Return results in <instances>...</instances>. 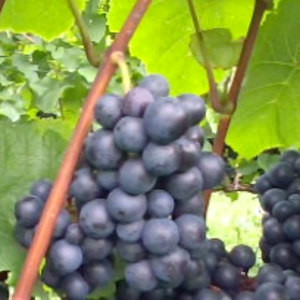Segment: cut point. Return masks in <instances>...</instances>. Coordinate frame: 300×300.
<instances>
[{
  "instance_id": "cut-point-1",
  "label": "cut point",
  "mask_w": 300,
  "mask_h": 300,
  "mask_svg": "<svg viewBox=\"0 0 300 300\" xmlns=\"http://www.w3.org/2000/svg\"><path fill=\"white\" fill-rule=\"evenodd\" d=\"M110 57L112 62L116 64L119 69L122 79L123 93L127 94L132 88V80L130 71L125 63L126 59L124 57V53H122V50H115L111 53Z\"/></svg>"
}]
</instances>
